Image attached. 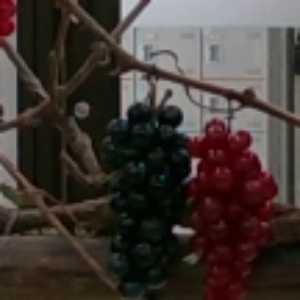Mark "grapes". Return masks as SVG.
I'll use <instances>...</instances> for the list:
<instances>
[{"label": "grapes", "instance_id": "obj_1", "mask_svg": "<svg viewBox=\"0 0 300 300\" xmlns=\"http://www.w3.org/2000/svg\"><path fill=\"white\" fill-rule=\"evenodd\" d=\"M184 120L176 105L153 108L131 104L126 119L106 127L102 148L115 168L111 180L118 192L111 199L119 228L111 238V270L121 274V296L139 300L145 290L168 282L163 269L178 252L172 232L176 212L185 203L180 183L192 172L191 156L201 158L198 177L188 183L196 199L187 224L194 233L193 253L211 266L205 300H244L245 278L259 248L272 239V200L279 183L262 171L259 155L250 148L251 133L228 134L226 123L212 116L205 136L189 137L176 130Z\"/></svg>", "mask_w": 300, "mask_h": 300}]
</instances>
